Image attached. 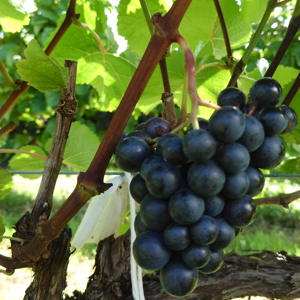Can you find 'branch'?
Wrapping results in <instances>:
<instances>
[{
	"instance_id": "30e6481e",
	"label": "branch",
	"mask_w": 300,
	"mask_h": 300,
	"mask_svg": "<svg viewBox=\"0 0 300 300\" xmlns=\"http://www.w3.org/2000/svg\"><path fill=\"white\" fill-rule=\"evenodd\" d=\"M192 1L175 0L164 16L163 12H156L151 17L146 1L139 0L151 35L149 44L120 99L88 169L78 173L74 190L49 219L53 208L54 188L62 167L71 120L78 108V101L75 98L77 61L65 60V67L69 68L68 89L60 92L51 148L43 167L42 181L35 197L29 222L31 231L36 234L20 247L13 257L0 254V265L8 273H13L27 259L43 255L48 250V245L59 237L61 231L91 197L104 194L113 186L112 183H104L106 169L111 157L115 155L116 145L158 64L164 86V93L161 94V116L171 124L172 129H175L177 119L166 57L170 56L171 44L174 43L172 34L178 30Z\"/></svg>"
},
{
	"instance_id": "325d2c04",
	"label": "branch",
	"mask_w": 300,
	"mask_h": 300,
	"mask_svg": "<svg viewBox=\"0 0 300 300\" xmlns=\"http://www.w3.org/2000/svg\"><path fill=\"white\" fill-rule=\"evenodd\" d=\"M213 2H214L216 14H217L219 22H220V26H221L222 34H223V38H224V43H225V47H226V67L228 68V70L231 74V77L229 79V83H228L227 87L228 86L238 87L237 79L239 78V76L241 75V73L243 72L245 67L247 66L248 61L250 60L252 53L254 51V48H255L257 42L259 41L260 35L262 34L266 24L268 23L269 18L272 14V11L276 7L277 0H268L267 1V4L265 6V11L254 31V35L252 36L244 55L239 59V61L237 62L236 65L234 63L233 52H232V49L230 46V40H229L227 26H226L224 15H223V9L221 7L219 0H213Z\"/></svg>"
},
{
	"instance_id": "170604dd",
	"label": "branch",
	"mask_w": 300,
	"mask_h": 300,
	"mask_svg": "<svg viewBox=\"0 0 300 300\" xmlns=\"http://www.w3.org/2000/svg\"><path fill=\"white\" fill-rule=\"evenodd\" d=\"M300 29V0L297 1L295 5L294 12L290 18V21L288 23V29L287 33L276 51V54L274 58L271 61V64L269 65V68L266 70V73L263 77H271L275 74L276 69L278 68L279 64L281 63L284 54L287 52L290 44L293 41V38L295 37L296 33Z\"/></svg>"
},
{
	"instance_id": "45aa463d",
	"label": "branch",
	"mask_w": 300,
	"mask_h": 300,
	"mask_svg": "<svg viewBox=\"0 0 300 300\" xmlns=\"http://www.w3.org/2000/svg\"><path fill=\"white\" fill-rule=\"evenodd\" d=\"M75 5V0H71L69 6L67 7L66 17L62 25L59 27L55 36L44 50L46 56H50L52 54L53 50L56 48L66 30L72 25L73 22H75L80 17L79 13H75Z\"/></svg>"
},
{
	"instance_id": "982ccf7c",
	"label": "branch",
	"mask_w": 300,
	"mask_h": 300,
	"mask_svg": "<svg viewBox=\"0 0 300 300\" xmlns=\"http://www.w3.org/2000/svg\"><path fill=\"white\" fill-rule=\"evenodd\" d=\"M27 83L28 82L26 81L21 82L20 79H17L15 81L14 91L11 93L9 98L0 108V122L3 118H5V115L10 111V109L14 106L16 101L23 95V93L30 88V85Z\"/></svg>"
},
{
	"instance_id": "1ff4a987",
	"label": "branch",
	"mask_w": 300,
	"mask_h": 300,
	"mask_svg": "<svg viewBox=\"0 0 300 300\" xmlns=\"http://www.w3.org/2000/svg\"><path fill=\"white\" fill-rule=\"evenodd\" d=\"M300 199V190L292 192L290 194L280 193L277 197H261L255 199L257 206L258 205H269V204H279L284 208L289 209L290 203Z\"/></svg>"
},
{
	"instance_id": "ea751061",
	"label": "branch",
	"mask_w": 300,
	"mask_h": 300,
	"mask_svg": "<svg viewBox=\"0 0 300 300\" xmlns=\"http://www.w3.org/2000/svg\"><path fill=\"white\" fill-rule=\"evenodd\" d=\"M299 88H300V72L298 76L295 78L294 82L291 84V87L289 88L287 95L285 96L281 104L290 105L291 101L296 96Z\"/></svg>"
}]
</instances>
